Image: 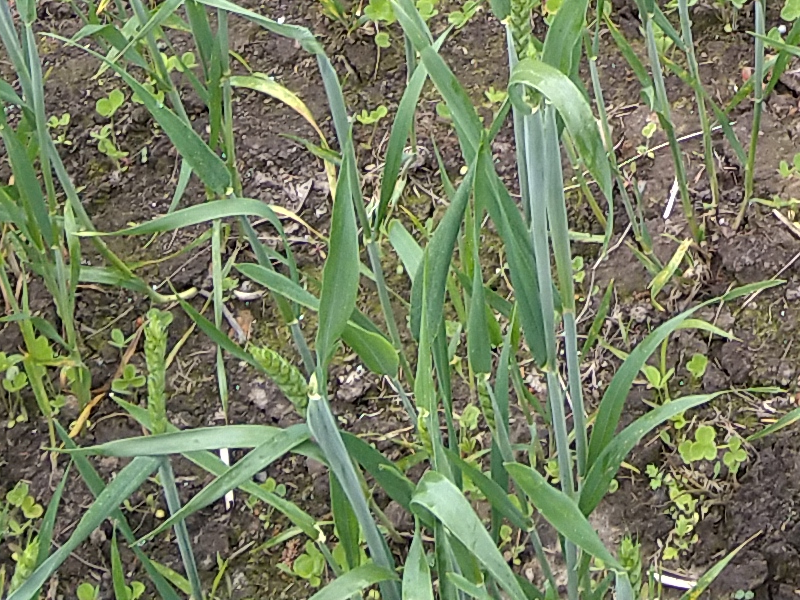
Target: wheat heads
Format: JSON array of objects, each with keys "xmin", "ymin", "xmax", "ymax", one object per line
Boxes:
[
  {"xmin": 512, "ymin": 0, "xmax": 533, "ymax": 64},
  {"xmin": 147, "ymin": 315, "xmax": 167, "ymax": 426},
  {"xmin": 618, "ymin": 535, "xmax": 642, "ymax": 586},
  {"xmin": 243, "ymin": 346, "xmax": 313, "ymax": 416}
]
